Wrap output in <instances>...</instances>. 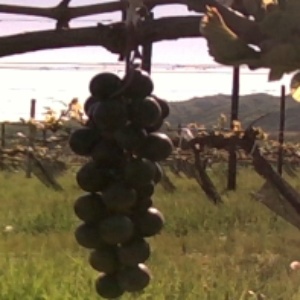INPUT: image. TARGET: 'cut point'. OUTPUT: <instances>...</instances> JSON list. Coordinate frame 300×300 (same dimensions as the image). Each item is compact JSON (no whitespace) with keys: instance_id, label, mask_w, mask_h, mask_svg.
I'll use <instances>...</instances> for the list:
<instances>
[{"instance_id":"cut-point-1","label":"cut point","mask_w":300,"mask_h":300,"mask_svg":"<svg viewBox=\"0 0 300 300\" xmlns=\"http://www.w3.org/2000/svg\"><path fill=\"white\" fill-rule=\"evenodd\" d=\"M134 27L130 26L127 31V39L125 45V75L130 72V50Z\"/></svg>"}]
</instances>
